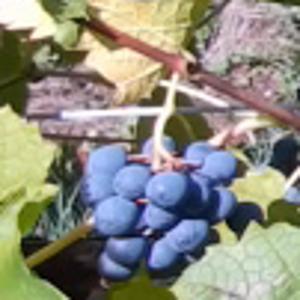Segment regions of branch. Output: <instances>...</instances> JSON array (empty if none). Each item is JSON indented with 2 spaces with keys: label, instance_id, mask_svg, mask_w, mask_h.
<instances>
[{
  "label": "branch",
  "instance_id": "obj_1",
  "mask_svg": "<svg viewBox=\"0 0 300 300\" xmlns=\"http://www.w3.org/2000/svg\"><path fill=\"white\" fill-rule=\"evenodd\" d=\"M77 22L81 26L95 28L101 31L107 36L118 40L120 43L125 44L131 47L132 49L139 51L140 53L145 54L146 56L155 60L157 63L162 64L163 66L170 67L172 69L174 67H179L182 72L206 83L210 87L222 92L223 94L237 99L240 102L254 104L256 108L270 114L271 116H274L282 123L291 125L295 128H300L299 114L280 108L275 103L265 99L264 97L255 95L250 92H246L243 89L222 82L221 80L216 79L209 73L202 71L201 69H198L197 67L192 66L189 63L167 57L166 55L161 54L158 50L152 48L151 46L144 44L139 40H136L135 38L125 34L119 29L108 25L106 22L100 19L88 18L85 15H79L77 17Z\"/></svg>",
  "mask_w": 300,
  "mask_h": 300
}]
</instances>
